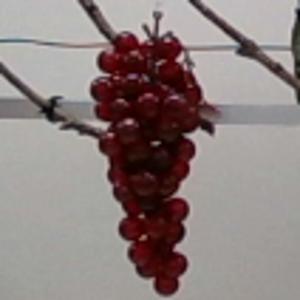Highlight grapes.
<instances>
[{
	"instance_id": "1",
	"label": "grapes",
	"mask_w": 300,
	"mask_h": 300,
	"mask_svg": "<svg viewBox=\"0 0 300 300\" xmlns=\"http://www.w3.org/2000/svg\"><path fill=\"white\" fill-rule=\"evenodd\" d=\"M182 43L172 33L139 42L121 31L96 57L108 76L92 80L89 93L97 120L109 123L99 141L109 157L106 178L127 216L117 232L130 242L126 256L135 273L153 281L157 294L170 297L180 287L189 261L173 251L183 242L191 206L174 196L191 172L197 153L193 134L200 125L196 110L204 101L197 78L175 60Z\"/></svg>"
}]
</instances>
